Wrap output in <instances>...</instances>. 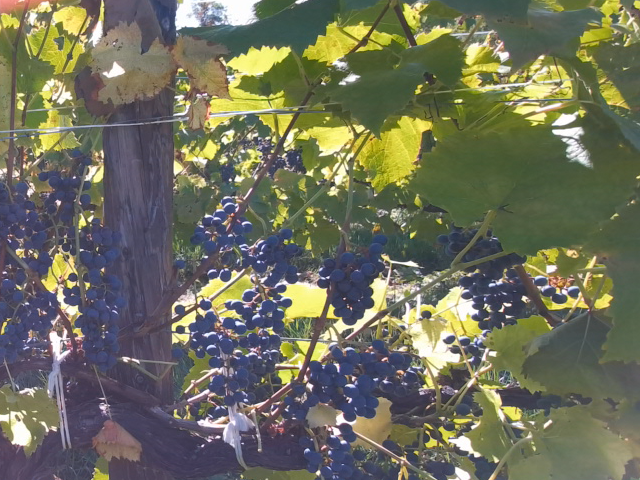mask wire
<instances>
[{
    "mask_svg": "<svg viewBox=\"0 0 640 480\" xmlns=\"http://www.w3.org/2000/svg\"><path fill=\"white\" fill-rule=\"evenodd\" d=\"M84 104H66V105H57V106H49V107H34L28 108L26 110L27 114L36 113V112H51V111H59V110H68V109H84Z\"/></svg>",
    "mask_w": 640,
    "mask_h": 480,
    "instance_id": "obj_4",
    "label": "wire"
},
{
    "mask_svg": "<svg viewBox=\"0 0 640 480\" xmlns=\"http://www.w3.org/2000/svg\"><path fill=\"white\" fill-rule=\"evenodd\" d=\"M184 117L176 118H159L149 121H135V122H120V123H97L89 126H63V127H26L15 129L0 130V135L6 134H18L28 132H65V131H92L99 128H122V127H137V126H151L162 123H179L184 122Z\"/></svg>",
    "mask_w": 640,
    "mask_h": 480,
    "instance_id": "obj_1",
    "label": "wire"
},
{
    "mask_svg": "<svg viewBox=\"0 0 640 480\" xmlns=\"http://www.w3.org/2000/svg\"><path fill=\"white\" fill-rule=\"evenodd\" d=\"M573 77H557L546 80H536V81H521V82H507L501 84H494L489 86H471V87H460V88H446V89H430L426 91H419V96H428L432 94H448V93H462V92H474V91H492L496 89H503L509 87H523V86H538V85H548L559 82H573Z\"/></svg>",
    "mask_w": 640,
    "mask_h": 480,
    "instance_id": "obj_3",
    "label": "wire"
},
{
    "mask_svg": "<svg viewBox=\"0 0 640 480\" xmlns=\"http://www.w3.org/2000/svg\"><path fill=\"white\" fill-rule=\"evenodd\" d=\"M310 103L302 104H286L282 105L281 109H257L246 110L238 112H221L213 113L209 115L210 119L223 118V117H240L248 115L259 114H308V113H339V108H310Z\"/></svg>",
    "mask_w": 640,
    "mask_h": 480,
    "instance_id": "obj_2",
    "label": "wire"
}]
</instances>
